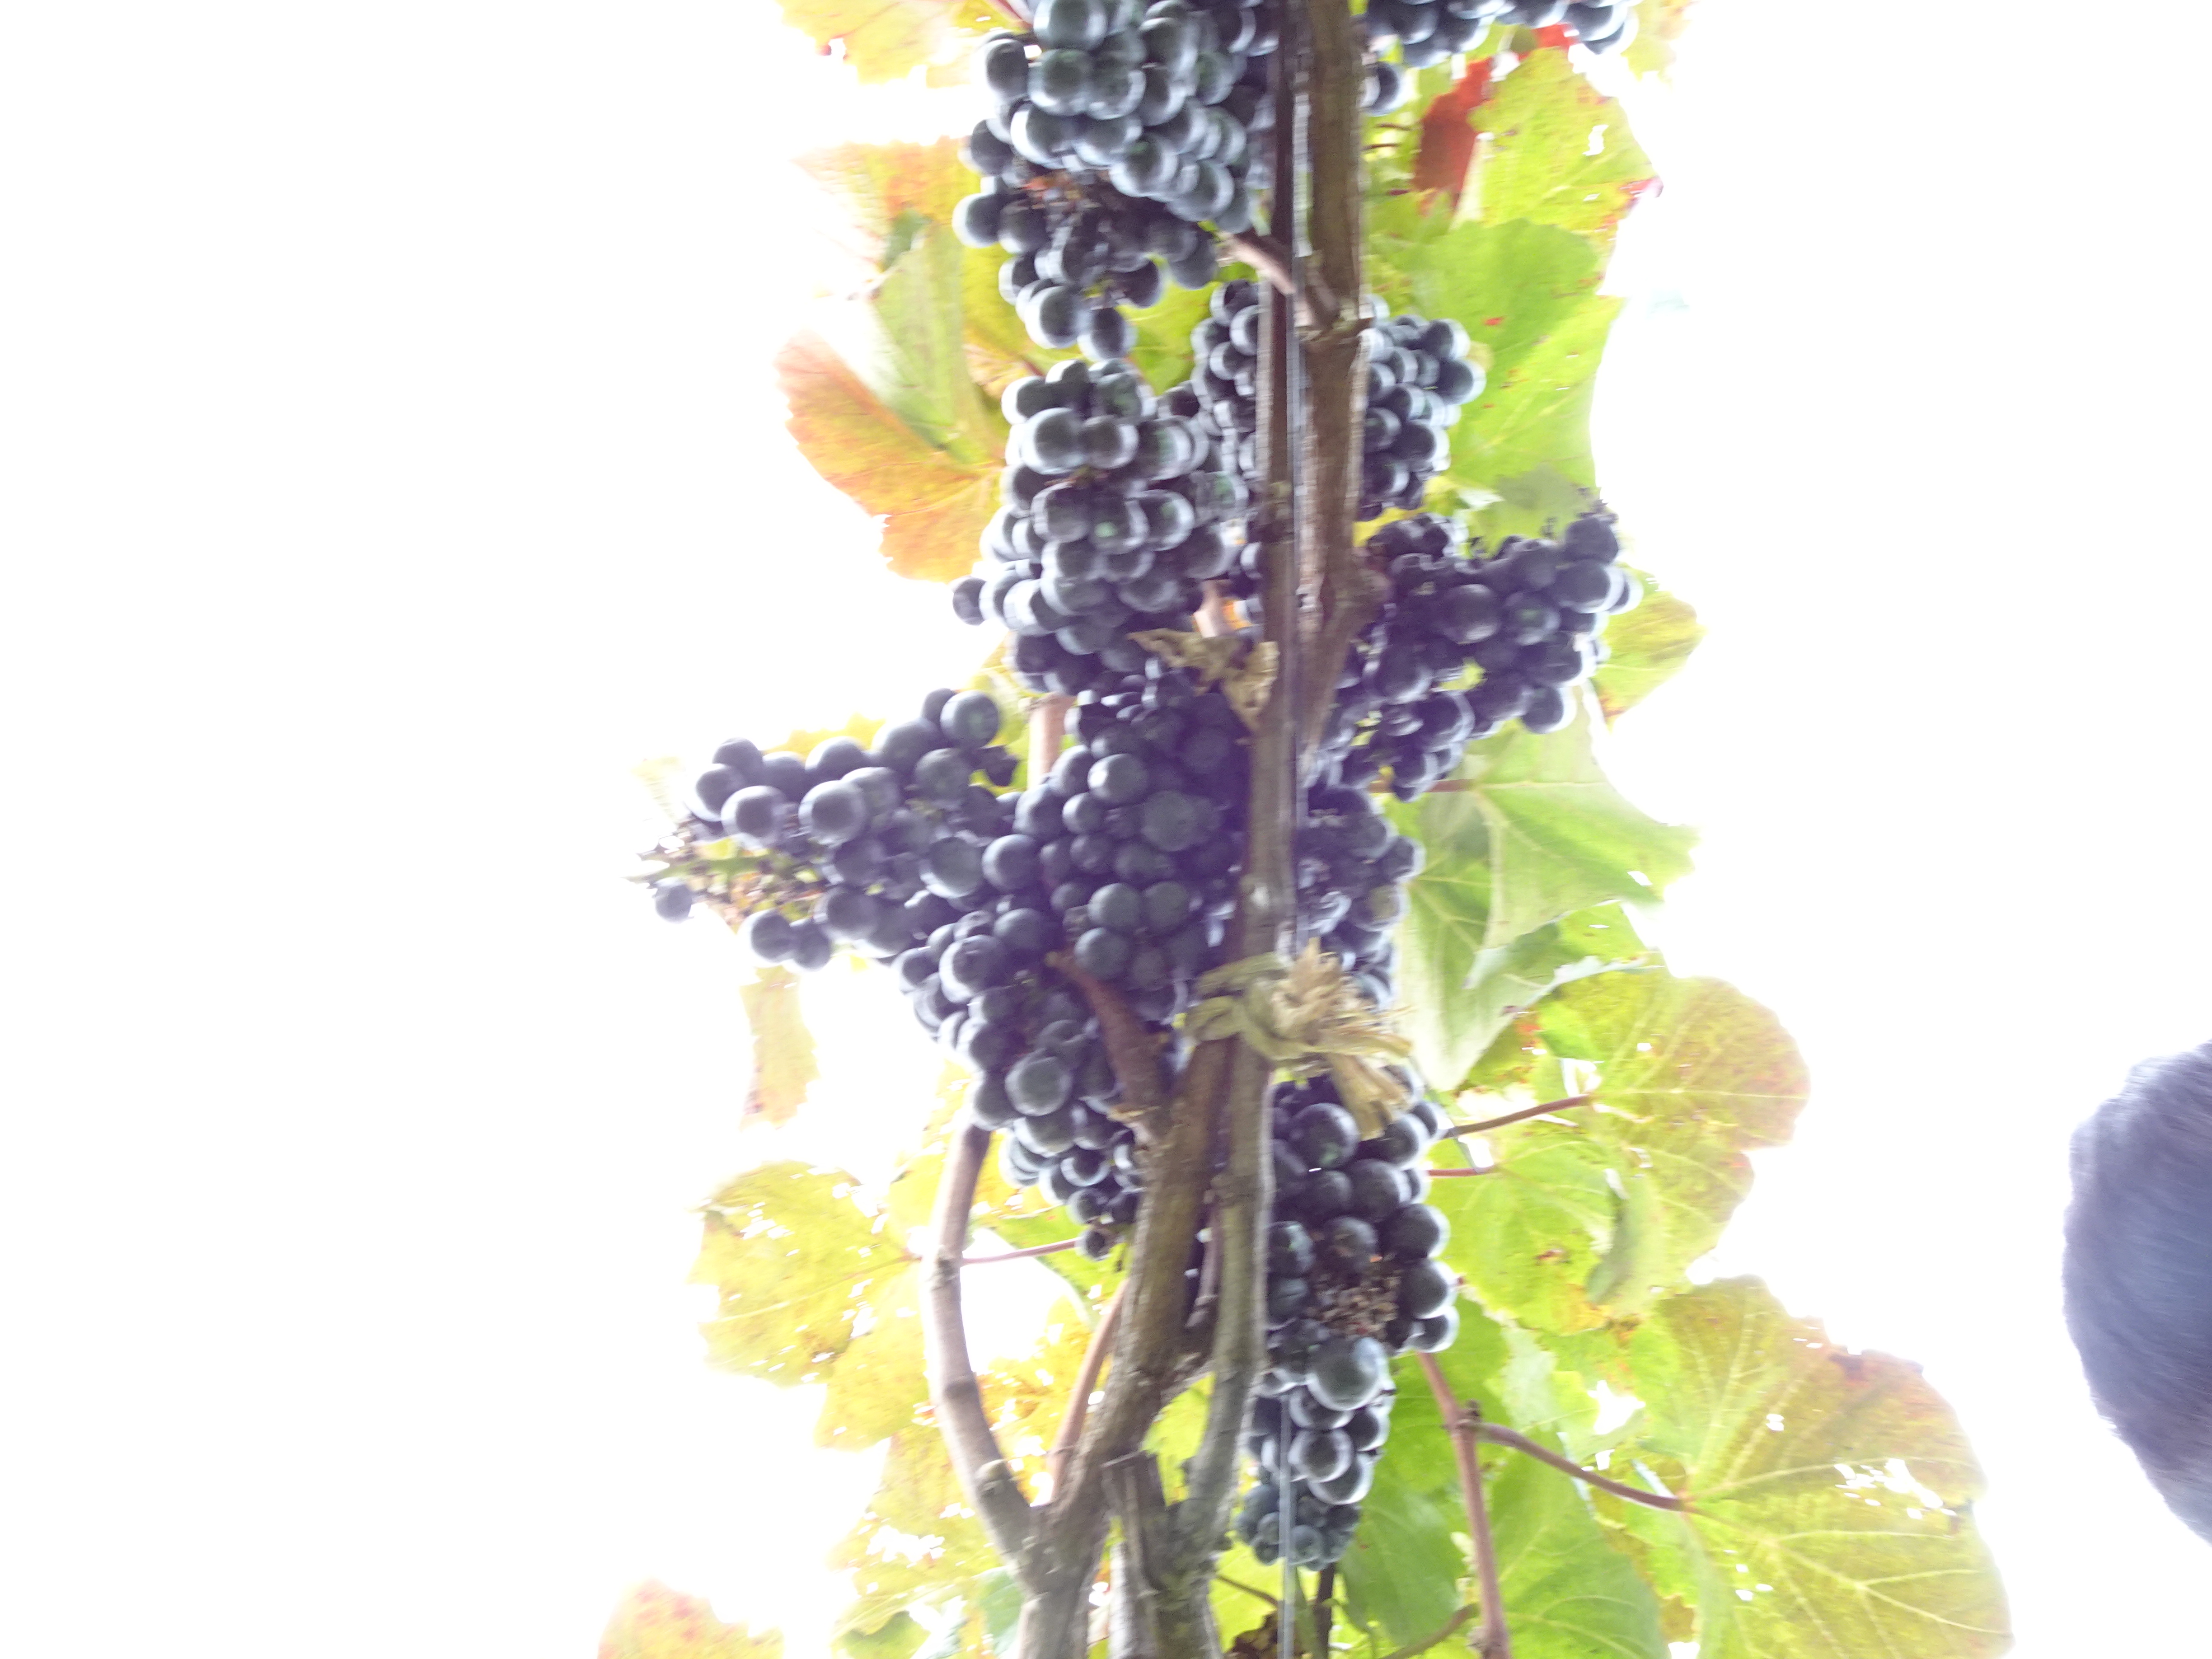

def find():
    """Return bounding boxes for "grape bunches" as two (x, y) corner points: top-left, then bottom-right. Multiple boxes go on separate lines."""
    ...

(969, 0), (1289, 244)
(1333, 0), (1636, 120)
(884, 900), (1184, 1269)
(1234, 1045), (1465, 1509)
(1227, 1457), (1374, 1579)
(1287, 751), (1430, 1034)
(947, 356), (1235, 699)
(1185, 270), (1497, 523)
(645, 681), (1028, 985)
(952, 166), (1231, 367)
(990, 671), (1262, 1026)
(1228, 507), (1645, 799)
